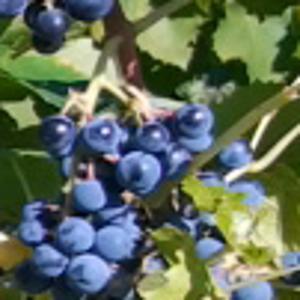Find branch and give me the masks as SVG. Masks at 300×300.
Returning a JSON list of instances; mask_svg holds the SVG:
<instances>
[{"instance_id":"branch-1","label":"branch","mask_w":300,"mask_h":300,"mask_svg":"<svg viewBox=\"0 0 300 300\" xmlns=\"http://www.w3.org/2000/svg\"><path fill=\"white\" fill-rule=\"evenodd\" d=\"M110 35L116 40L117 52L120 55L122 72L129 87L136 93L143 92V71L135 46V28L122 21V9L118 4L114 12L105 20Z\"/></svg>"}]
</instances>
